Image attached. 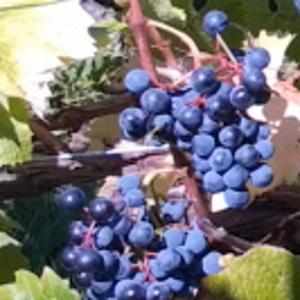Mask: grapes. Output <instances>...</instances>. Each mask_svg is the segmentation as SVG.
Here are the masks:
<instances>
[{"instance_id": "grapes-1", "label": "grapes", "mask_w": 300, "mask_h": 300, "mask_svg": "<svg viewBox=\"0 0 300 300\" xmlns=\"http://www.w3.org/2000/svg\"><path fill=\"white\" fill-rule=\"evenodd\" d=\"M271 54L262 46L232 47L203 55L190 68V85L176 92L153 85L142 68L127 72L123 85L137 97L116 117L128 142L163 145L165 140L191 155L190 168L206 196L223 193L227 208L248 206L249 185L268 189L274 181L269 162L277 153L272 126L247 116L271 99L266 73Z\"/></svg>"}, {"instance_id": "grapes-2", "label": "grapes", "mask_w": 300, "mask_h": 300, "mask_svg": "<svg viewBox=\"0 0 300 300\" xmlns=\"http://www.w3.org/2000/svg\"><path fill=\"white\" fill-rule=\"evenodd\" d=\"M117 193L87 201L83 189L69 187L57 196L61 210L84 208L90 220L70 221L57 251L76 291L84 300H192L191 281L217 276L223 253L209 250L198 229H155L137 175L122 176Z\"/></svg>"}, {"instance_id": "grapes-3", "label": "grapes", "mask_w": 300, "mask_h": 300, "mask_svg": "<svg viewBox=\"0 0 300 300\" xmlns=\"http://www.w3.org/2000/svg\"><path fill=\"white\" fill-rule=\"evenodd\" d=\"M229 25V15L223 9L208 8L201 15V27L210 36H225Z\"/></svg>"}, {"instance_id": "grapes-4", "label": "grapes", "mask_w": 300, "mask_h": 300, "mask_svg": "<svg viewBox=\"0 0 300 300\" xmlns=\"http://www.w3.org/2000/svg\"><path fill=\"white\" fill-rule=\"evenodd\" d=\"M187 213V206L180 199H167L161 202L157 208L159 220L167 223H179L183 221Z\"/></svg>"}]
</instances>
